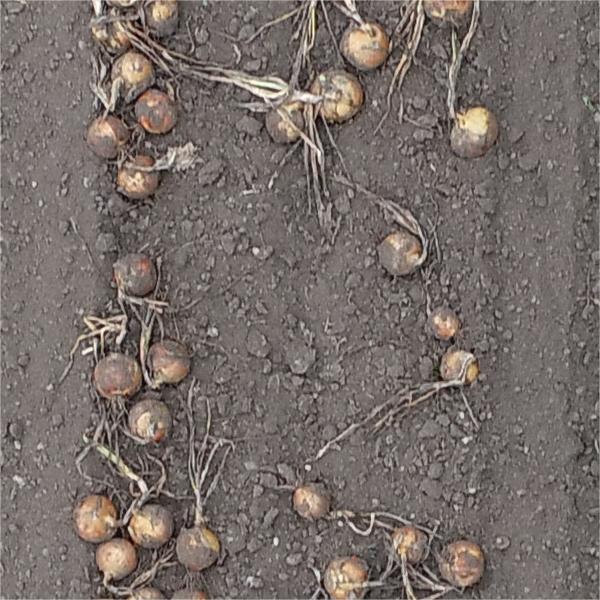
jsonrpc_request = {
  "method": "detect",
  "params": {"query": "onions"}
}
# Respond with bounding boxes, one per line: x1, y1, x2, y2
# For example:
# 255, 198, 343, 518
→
92, 354, 139, 397
140, 0, 176, 33
290, 484, 328, 520
86, 115, 126, 156
113, 253, 154, 295
440, 349, 477, 384
342, 21, 388, 67
125, 398, 170, 441
449, 103, 496, 156
170, 589, 211, 600
110, 53, 153, 96
313, 68, 362, 119
269, 107, 302, 140
96, 538, 136, 577
93, 18, 130, 52
128, 502, 172, 546
145, 339, 189, 383
421, 1, 469, 24
74, 494, 118, 538
429, 306, 460, 338
388, 525, 422, 559
126, 586, 167, 600
377, 229, 422, 274
442, 540, 483, 584
131, 86, 177, 132
117, 153, 156, 196
323, 556, 367, 594
174, 525, 220, 570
